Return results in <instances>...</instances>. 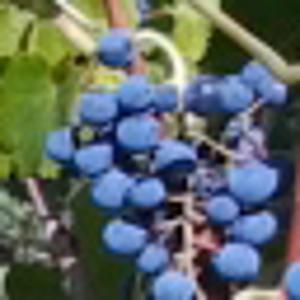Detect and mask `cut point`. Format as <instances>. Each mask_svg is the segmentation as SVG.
<instances>
[{
	"label": "cut point",
	"mask_w": 300,
	"mask_h": 300,
	"mask_svg": "<svg viewBox=\"0 0 300 300\" xmlns=\"http://www.w3.org/2000/svg\"><path fill=\"white\" fill-rule=\"evenodd\" d=\"M139 32L140 37L153 38L163 44L174 62V80L182 82L185 79L184 58L178 48L169 40V36L160 29L153 27L140 28Z\"/></svg>",
	"instance_id": "1"
}]
</instances>
